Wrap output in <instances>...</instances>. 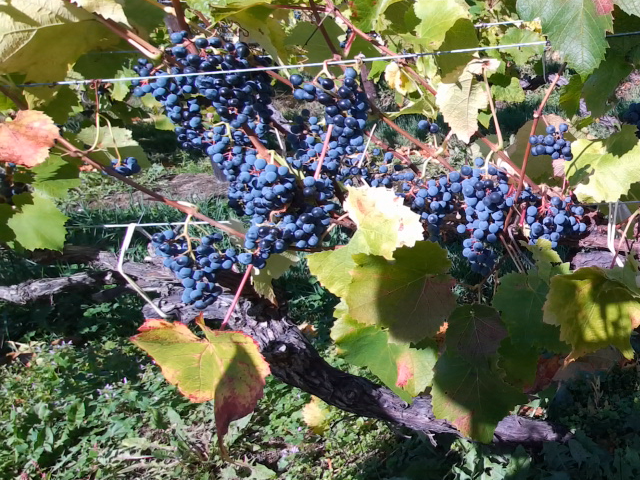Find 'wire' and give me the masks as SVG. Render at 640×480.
Masks as SVG:
<instances>
[{
	"instance_id": "1",
	"label": "wire",
	"mask_w": 640,
	"mask_h": 480,
	"mask_svg": "<svg viewBox=\"0 0 640 480\" xmlns=\"http://www.w3.org/2000/svg\"><path fill=\"white\" fill-rule=\"evenodd\" d=\"M321 66L320 62L317 63H295V64H285V65H275V66H259V67H245L240 69H208V70H199V71H189L185 73H175L169 75H151V76H135L128 78H100L94 79L90 81H56V82H45V83H15V88L20 89H32V88H47V87H58V86H92L96 84L102 83H130V82H138V81H153V80H172L178 78H187L191 76H201V75H210V74H243L247 72H262V71H278V70H287V69H298V68H319Z\"/></svg>"
},
{
	"instance_id": "2",
	"label": "wire",
	"mask_w": 640,
	"mask_h": 480,
	"mask_svg": "<svg viewBox=\"0 0 640 480\" xmlns=\"http://www.w3.org/2000/svg\"><path fill=\"white\" fill-rule=\"evenodd\" d=\"M548 44H549L548 40H542V41H531V42H523V43L491 44V45L479 46V47L447 48V49L428 50V51H420V52H407L405 54L395 55V56H374V57L334 60V61H329L327 63V66L331 67V66L343 65V64L377 62V61H397V60L408 59L410 57H422V56L440 55V54H449V53L482 52V51H489L493 49L525 48V47H534V46H545Z\"/></svg>"
},
{
	"instance_id": "3",
	"label": "wire",
	"mask_w": 640,
	"mask_h": 480,
	"mask_svg": "<svg viewBox=\"0 0 640 480\" xmlns=\"http://www.w3.org/2000/svg\"><path fill=\"white\" fill-rule=\"evenodd\" d=\"M185 220H170L164 222H114V223H90L82 225H67V230H84L92 228H116V227H166L172 225H185Z\"/></svg>"
},
{
	"instance_id": "4",
	"label": "wire",
	"mask_w": 640,
	"mask_h": 480,
	"mask_svg": "<svg viewBox=\"0 0 640 480\" xmlns=\"http://www.w3.org/2000/svg\"><path fill=\"white\" fill-rule=\"evenodd\" d=\"M521 23H522L521 19H504L499 21H489V22H484L480 24H474L473 28L482 29V28L492 27V26H501V25H507V24H521Z\"/></svg>"
},
{
	"instance_id": "5",
	"label": "wire",
	"mask_w": 640,
	"mask_h": 480,
	"mask_svg": "<svg viewBox=\"0 0 640 480\" xmlns=\"http://www.w3.org/2000/svg\"><path fill=\"white\" fill-rule=\"evenodd\" d=\"M637 35H640V30H634V31H630V32H622V33H611V34H607L606 38L607 39H614V38L633 37V36H637Z\"/></svg>"
}]
</instances>
